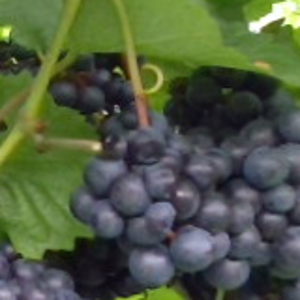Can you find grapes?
<instances>
[{
    "label": "grapes",
    "mask_w": 300,
    "mask_h": 300,
    "mask_svg": "<svg viewBox=\"0 0 300 300\" xmlns=\"http://www.w3.org/2000/svg\"><path fill=\"white\" fill-rule=\"evenodd\" d=\"M174 95L151 125L102 122L105 155L70 193L73 216L117 239L142 286L204 269L238 290L258 266L300 278V115L288 90L262 71L206 65Z\"/></svg>",
    "instance_id": "grapes-1"
}]
</instances>
